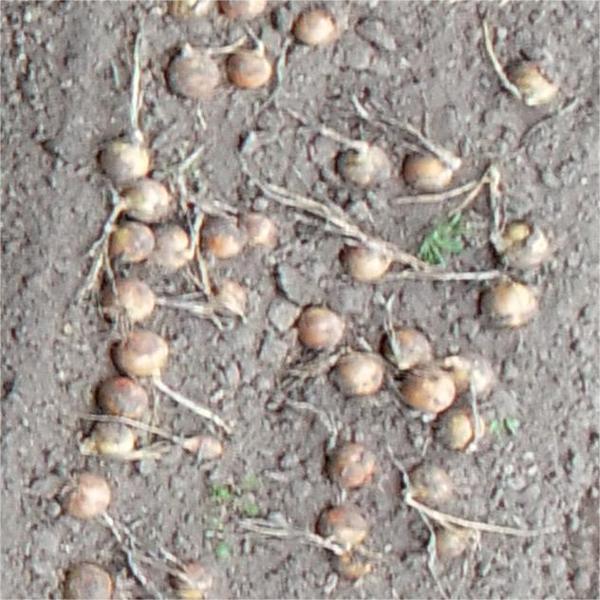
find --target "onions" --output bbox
[223,0,266,20]
[114,330,166,378]
[498,220,548,270]
[108,280,156,321]
[409,462,455,505]
[64,562,112,599]
[243,214,276,248]
[229,50,271,91]
[329,441,377,491]
[113,224,155,263]
[446,353,494,396]
[400,367,453,412]
[156,223,192,267]
[207,280,248,324]
[383,325,429,369]
[436,409,475,449]
[62,473,108,518]
[317,505,369,549]
[332,549,369,580]
[344,242,387,281]
[504,58,555,106]
[99,139,151,183]
[92,417,134,459]
[203,218,241,258]
[292,7,336,46]
[483,280,536,327]
[432,520,471,564]
[169,0,219,19]
[334,352,383,395]
[338,141,389,188]
[98,375,146,418]
[402,148,451,189]
[172,561,211,598]
[167,52,219,97]
[297,306,340,347]
[123,178,169,222]
[189,433,222,463]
